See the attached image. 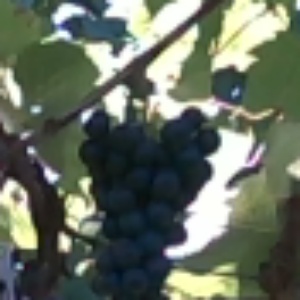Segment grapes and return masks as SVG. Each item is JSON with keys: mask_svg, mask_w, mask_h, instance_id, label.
Instances as JSON below:
<instances>
[{"mask_svg": "<svg viewBox=\"0 0 300 300\" xmlns=\"http://www.w3.org/2000/svg\"><path fill=\"white\" fill-rule=\"evenodd\" d=\"M90 138L78 149L94 177L92 198L106 215L108 241L91 283L93 294L119 300H155L171 271L163 248L188 238L181 213L214 173L207 158L221 145L219 131L203 111L190 107L164 125L160 138L145 134L136 120L110 126L95 112L84 124Z\"/></svg>", "mask_w": 300, "mask_h": 300, "instance_id": "grapes-1", "label": "grapes"}]
</instances>
